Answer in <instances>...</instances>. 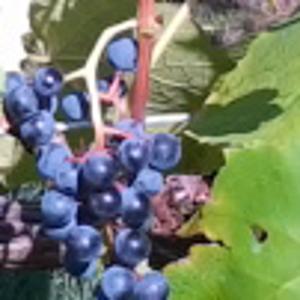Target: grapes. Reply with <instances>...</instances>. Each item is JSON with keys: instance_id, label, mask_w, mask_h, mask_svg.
Returning a JSON list of instances; mask_svg holds the SVG:
<instances>
[{"instance_id": "grapes-1", "label": "grapes", "mask_w": 300, "mask_h": 300, "mask_svg": "<svg viewBox=\"0 0 300 300\" xmlns=\"http://www.w3.org/2000/svg\"><path fill=\"white\" fill-rule=\"evenodd\" d=\"M64 88L56 68L38 69L30 81L4 73L3 111L32 155L34 175L53 181L39 204L43 236L66 241L64 264L75 279L102 276L96 300H166L172 284L160 271L139 277L152 254L145 228L168 172L182 160L170 132L145 135L142 122L85 118L84 94Z\"/></svg>"}, {"instance_id": "grapes-2", "label": "grapes", "mask_w": 300, "mask_h": 300, "mask_svg": "<svg viewBox=\"0 0 300 300\" xmlns=\"http://www.w3.org/2000/svg\"><path fill=\"white\" fill-rule=\"evenodd\" d=\"M107 59L117 73H132L140 64V54L133 37H116L107 45Z\"/></svg>"}, {"instance_id": "grapes-3", "label": "grapes", "mask_w": 300, "mask_h": 300, "mask_svg": "<svg viewBox=\"0 0 300 300\" xmlns=\"http://www.w3.org/2000/svg\"><path fill=\"white\" fill-rule=\"evenodd\" d=\"M113 83V77L106 75L96 82L95 90L97 94L107 95L109 93V87Z\"/></svg>"}]
</instances>
